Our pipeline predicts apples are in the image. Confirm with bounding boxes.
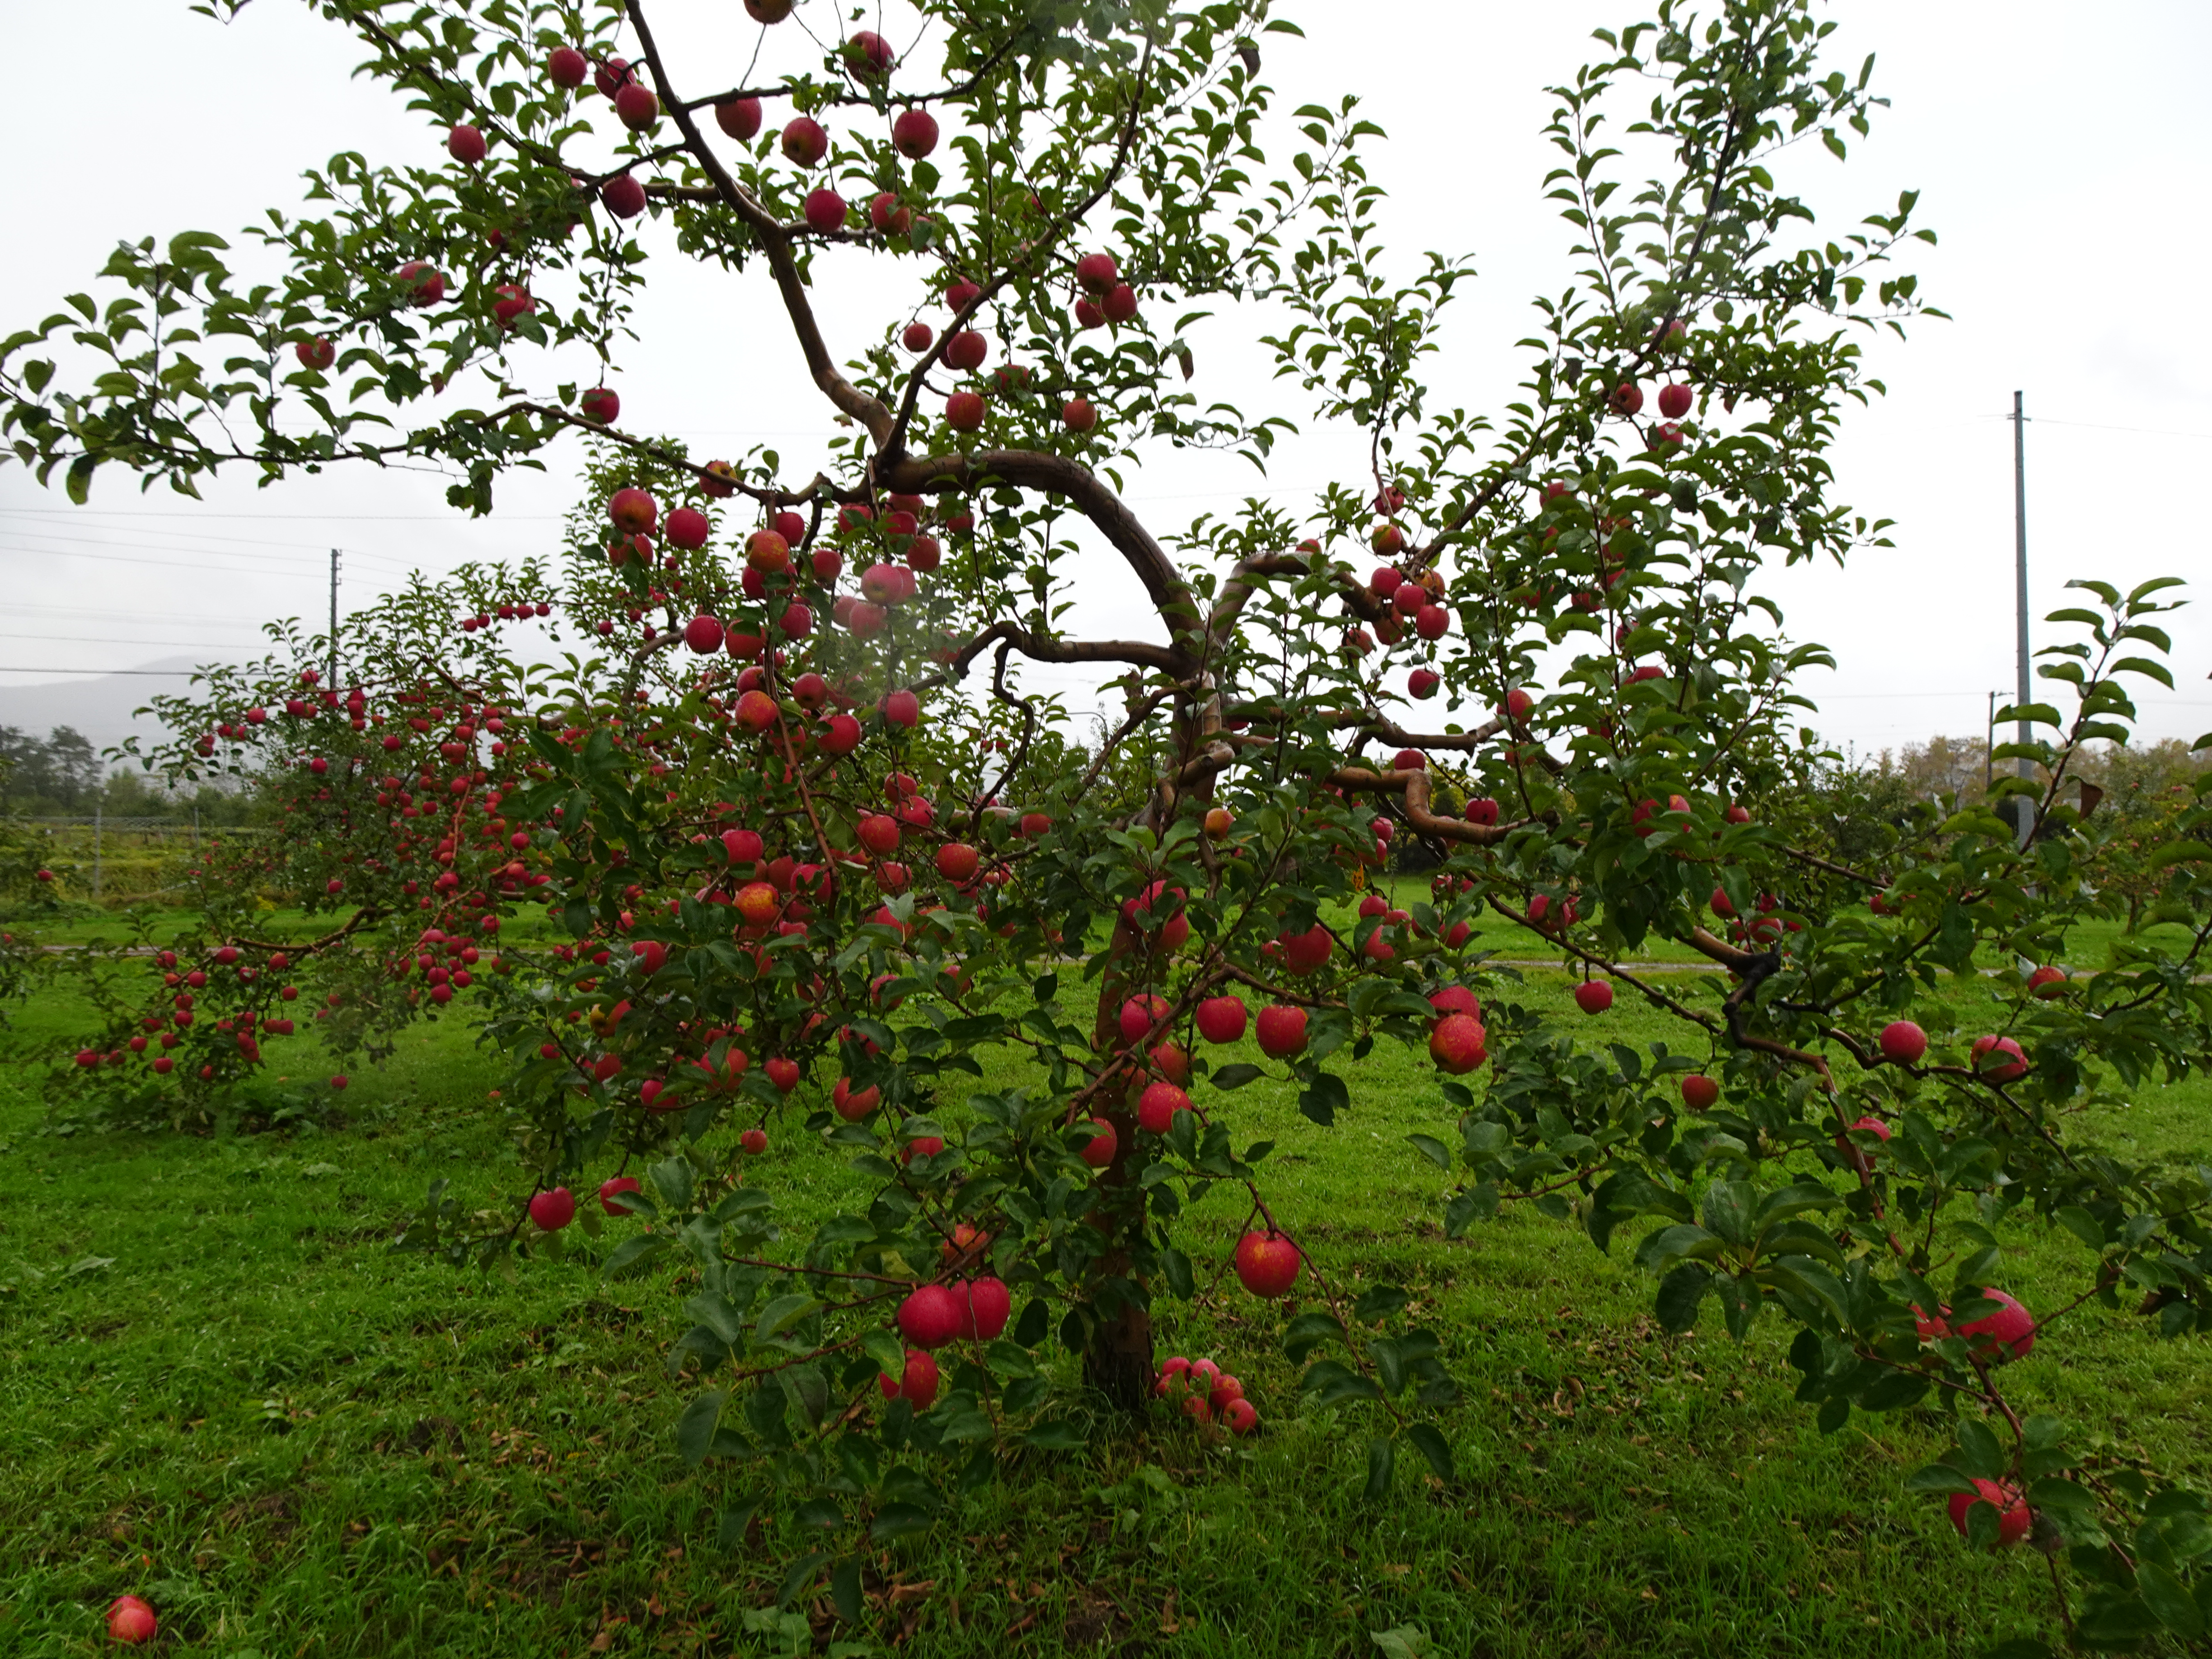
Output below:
[972,865,983,879]
[491,285,535,332]
[745,530,789,574]
[1235,1230,1301,1298]
[695,888,732,905]
[947,510,974,534]
[739,794,764,811]
[1296,539,1320,554]
[893,566,916,601]
[1908,1304,1953,1366]
[876,861,912,895]
[548,48,587,88]
[893,110,938,159]
[1331,790,1361,808]
[1440,816,1458,849]
[838,505,872,535]
[448,125,486,164]
[1632,799,1661,840]
[838,1024,880,1057]
[296,338,335,370]
[1948,1478,2005,1538]
[1658,384,1692,418]
[1713,829,1722,836]
[949,880,978,900]
[1372,525,1402,555]
[1600,515,1633,535]
[1528,896,1570,933]
[1140,879,1186,922]
[1308,775,1339,795]
[1075,297,1106,328]
[1371,567,1402,599]
[792,673,827,710]
[781,117,827,168]
[699,460,737,497]
[868,905,914,941]
[2028,966,2066,1000]
[1278,929,1288,945]
[1614,383,1643,413]
[615,84,660,132]
[1375,629,1403,645]
[998,922,1017,938]
[846,847,873,865]
[769,725,805,755]
[690,834,713,863]
[1633,666,1664,683]
[861,563,903,605]
[1995,1490,2030,1545]
[629,941,666,975]
[1725,802,1750,826]
[832,596,859,627]
[1429,1015,1487,1075]
[1710,886,1738,919]
[929,630,962,664]
[723,1025,745,1035]
[1412,570,1445,603]
[1022,194,1045,219]
[1319,822,1346,832]
[1970,1034,2026,1083]
[898,1285,963,1349]
[764,764,800,797]
[917,906,954,945]
[947,331,987,369]
[1439,919,1470,950]
[721,830,763,867]
[1394,750,1425,771]
[1566,896,1582,927]
[1869,894,1893,915]
[980,871,1000,889]
[488,229,515,251]
[703,1030,733,1046]
[997,862,1010,885]
[1948,888,1972,897]
[676,1018,702,1033]
[796,972,823,1002]
[565,223,574,234]
[733,859,768,892]
[1196,996,1246,1044]
[399,260,442,307]
[787,900,813,927]
[1505,744,1520,768]
[876,690,918,728]
[529,1186,575,1231]
[1497,689,1534,726]
[1465,798,1498,827]
[1411,915,1442,939]
[579,1053,621,1097]
[1540,577,1554,593]
[1653,320,1686,353]
[1893,893,1916,915]
[742,566,766,600]
[1278,899,1293,917]
[1149,1041,1196,1088]
[1960,1287,2034,1363]
[936,843,978,881]
[1204,808,1234,841]
[1836,1118,1890,1171]
[816,714,861,756]
[1284,924,1332,967]
[1587,719,1612,740]
[1228,721,1248,731]
[879,1350,939,1412]
[1599,567,1625,591]
[1575,979,1612,1014]
[946,275,980,315]
[871,193,910,236]
[1054,936,1064,943]
[1138,1082,1191,1135]
[1416,605,1450,640]
[857,809,873,819]
[811,549,842,582]
[715,96,762,140]
[976,796,999,807]
[641,1076,679,1113]
[946,392,985,433]
[582,388,619,424]
[1608,397,1622,414]
[828,848,848,861]
[1998,1475,2016,1493]
[1334,844,1356,867]
[1369,817,1393,844]
[1383,910,1411,933]
[904,216,932,252]
[1769,943,1792,957]
[1512,596,1522,604]
[775,512,804,547]
[828,674,863,709]
[977,904,999,922]
[802,704,826,718]
[1261,940,1285,962]
[1358,838,1387,866]
[864,912,875,924]
[1743,944,1767,957]
[1459,879,1473,894]
[595,58,636,102]
[871,975,904,1011]
[1296,806,1320,823]
[608,533,653,566]
[571,178,584,188]
[903,323,933,352]
[1063,399,1096,432]
[898,1137,944,1167]
[1232,836,1253,857]
[1038,919,1061,940]
[1426,985,1480,1034]
[1120,994,1172,1048]
[906,537,941,572]
[1014,241,1041,277]
[1393,585,1425,616]
[733,882,781,928]
[590,999,632,1038]
[1011,817,1024,838]
[1359,895,1388,921]
[1364,925,1395,961]
[884,772,917,804]
[735,691,778,735]
[774,921,810,953]
[737,941,772,976]
[1880,1021,1926,1066]
[1602,544,1624,562]
[833,1077,879,1123]
[699,698,723,721]
[703,803,737,836]
[805,189,847,234]
[1077,254,1117,295]
[1123,898,1143,933]
[1375,486,1404,516]
[1759,903,1772,913]
[885,511,917,544]
[1760,893,1775,905]
[1022,813,1053,841]
[1286,956,1314,977]
[666,508,708,550]
[600,1177,640,1217]
[1616,622,1640,649]
[1989,900,1993,906]
[1727,967,1739,983]
[2013,888,2028,919]
[859,864,875,876]
[1669,794,1690,833]
[1431,875,1453,898]
[1408,669,1438,699]
[846,31,894,84]
[800,1013,828,1041]
[1114,1050,1146,1087]
[1520,742,1537,766]
[949,1277,1011,1341]
[1528,526,1558,556]
[792,595,812,612]
[1648,422,1683,456]
[734,924,776,940]
[1523,590,1541,609]
[602,174,646,218]
[699,1048,748,1090]
[1681,1075,1719,1110]
[579,193,586,203]
[773,562,798,596]
[993,365,1029,390]
[685,615,724,654]
[938,345,961,371]
[850,601,887,639]
[1733,921,1746,941]
[778,603,812,639]
[1540,482,1572,508]
[764,1058,799,1094]
[1749,917,1782,944]
[736,666,768,698]
[1100,286,1137,322]
[885,494,924,518]
[610,488,656,535]
[1571,587,1601,612]
[943,1223,988,1271]
[1078,1117,1117,1167]
[1622,677,1635,685]
[1143,913,1189,951]
[725,619,766,660]
[1255,1004,1310,1058]
[856,815,899,856]
[741,1130,767,1155]
[937,965,971,995]
[1787,921,1801,932]
[1372,605,1404,635]
[790,864,831,904]
[1277,941,1288,957]
[767,855,804,893]
[894,796,932,834]
[675,1056,700,1067]
[1341,629,1373,655]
